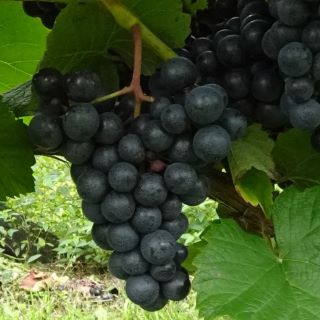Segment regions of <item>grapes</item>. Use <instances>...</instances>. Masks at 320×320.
<instances>
[{
	"label": "grapes",
	"mask_w": 320,
	"mask_h": 320,
	"mask_svg": "<svg viewBox=\"0 0 320 320\" xmlns=\"http://www.w3.org/2000/svg\"><path fill=\"white\" fill-rule=\"evenodd\" d=\"M67 4L41 0H23V9L27 15L34 18L40 17L48 29H53L57 14Z\"/></svg>",
	"instance_id": "grapes-2"
},
{
	"label": "grapes",
	"mask_w": 320,
	"mask_h": 320,
	"mask_svg": "<svg viewBox=\"0 0 320 320\" xmlns=\"http://www.w3.org/2000/svg\"><path fill=\"white\" fill-rule=\"evenodd\" d=\"M117 65L119 75V90L126 86H130L133 78V70L126 64L120 61H113Z\"/></svg>",
	"instance_id": "grapes-3"
},
{
	"label": "grapes",
	"mask_w": 320,
	"mask_h": 320,
	"mask_svg": "<svg viewBox=\"0 0 320 320\" xmlns=\"http://www.w3.org/2000/svg\"><path fill=\"white\" fill-rule=\"evenodd\" d=\"M195 10L182 49L152 75L140 73L139 117L133 94L87 104L101 77L54 68L33 75L44 100L28 135L41 152L62 153L93 222L109 272L126 281L130 301L147 312L182 301L191 284L175 243L188 228L182 202L206 199L202 172L221 169L231 142L262 124L277 140L313 133L320 153V0H207Z\"/></svg>",
	"instance_id": "grapes-1"
}]
</instances>
